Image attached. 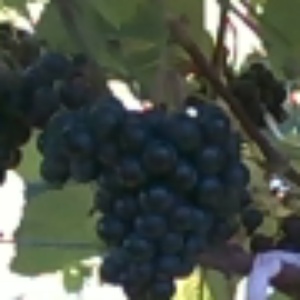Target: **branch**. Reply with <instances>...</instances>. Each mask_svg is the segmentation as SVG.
<instances>
[{"label":"branch","instance_id":"branch-1","mask_svg":"<svg viewBox=\"0 0 300 300\" xmlns=\"http://www.w3.org/2000/svg\"><path fill=\"white\" fill-rule=\"evenodd\" d=\"M230 10L231 3L228 0H223L218 7L213 43V65L209 63L191 38L190 31L186 28V19L183 16L170 19L167 22V28L173 33V38L177 42H181L199 69L209 77L237 122L248 132L249 138L269 159V162L285 177L292 179L294 182H299L300 170L292 162L291 157L285 150L268 141L259 132L258 126L248 117L235 94L225 82V70L229 56V48L225 45V42Z\"/></svg>","mask_w":300,"mask_h":300},{"label":"branch","instance_id":"branch-2","mask_svg":"<svg viewBox=\"0 0 300 300\" xmlns=\"http://www.w3.org/2000/svg\"><path fill=\"white\" fill-rule=\"evenodd\" d=\"M54 6L60 14L76 51L83 58L89 59L90 64L93 66L92 87L97 88L103 97H109L111 90L103 80V68L97 61L95 52L90 49L91 43L81 26L71 0H55Z\"/></svg>","mask_w":300,"mask_h":300}]
</instances>
